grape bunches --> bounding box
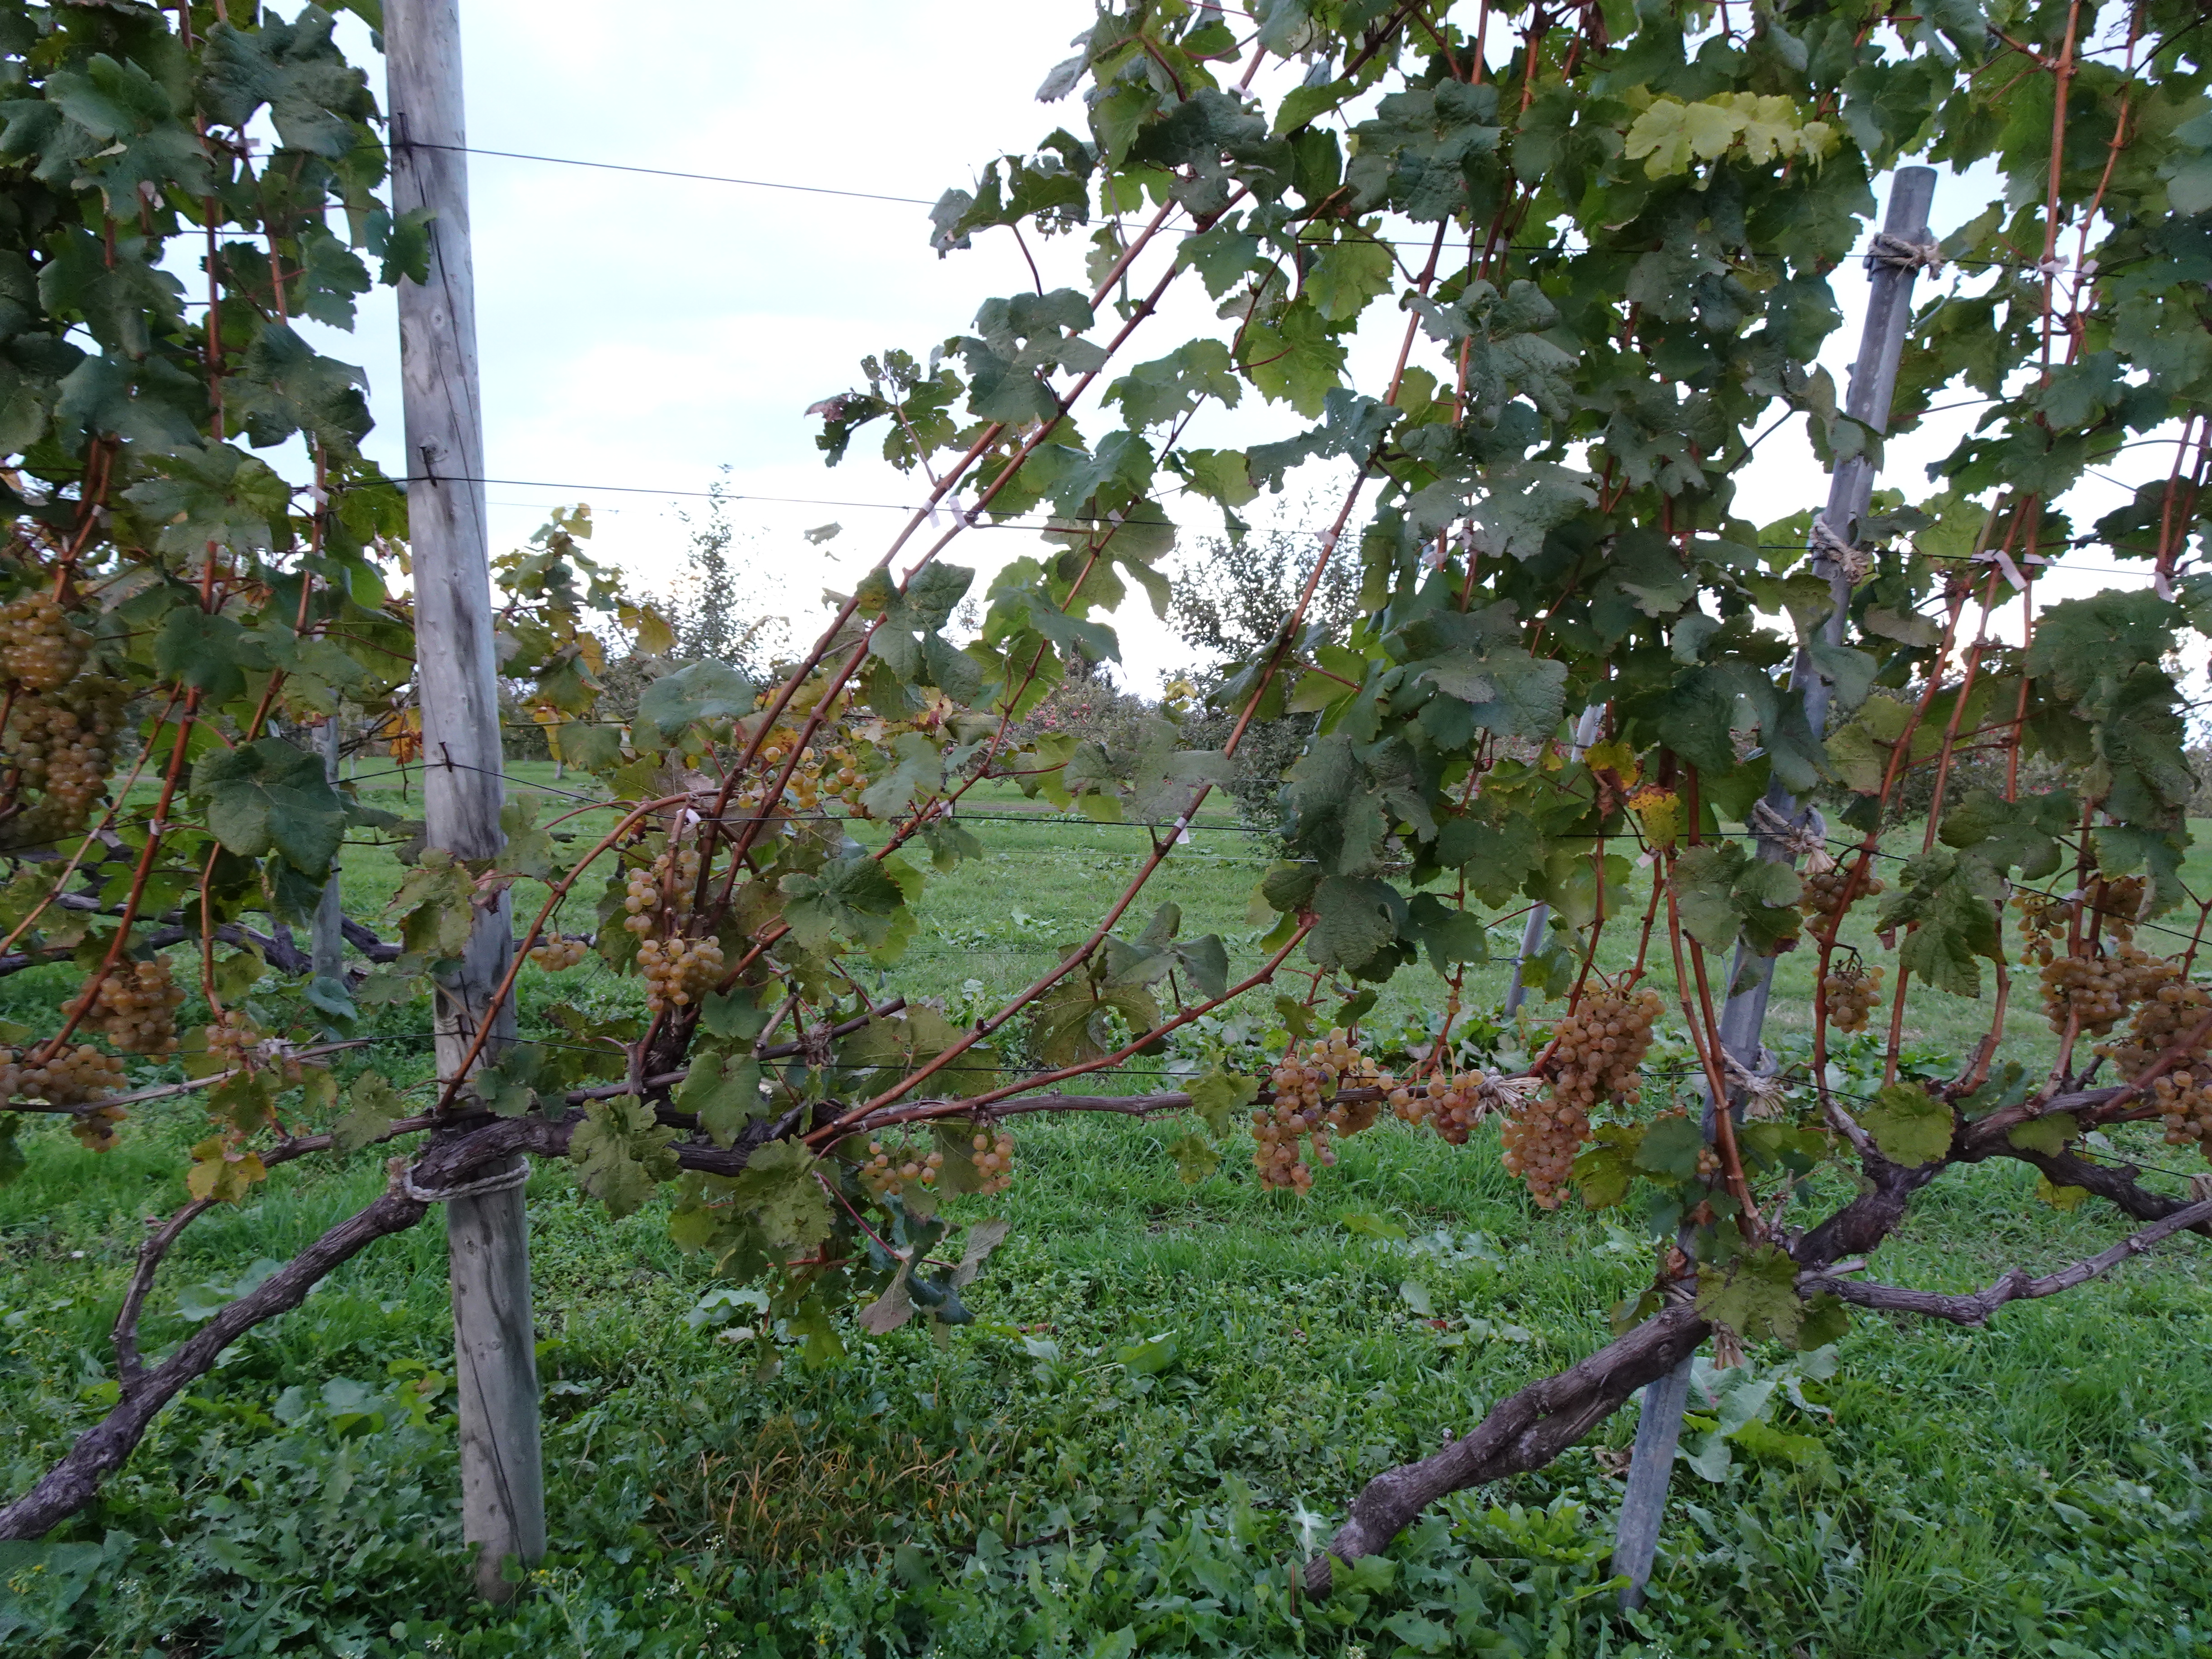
[41,1044,137,1158]
[1386,1082,1432,1132]
[1608,989,1668,1095]
[1810,962,1888,1035]
[1270,1059,1337,1165]
[1310,1027,1360,1078]
[824,723,872,819]
[734,770,767,808]
[10,695,55,792]
[636,937,695,1012]
[527,931,590,973]
[2091,1035,2160,1085]
[1651,1100,1700,1123]
[0,593,94,692]
[1247,1109,1314,1198]
[1428,1065,1486,1146]
[696,926,729,990]
[0,1039,55,1103]
[2040,957,2125,1039]
[1549,977,1619,1107]
[44,711,124,833]
[2014,893,2070,970]
[75,954,187,1072]
[1325,1054,1397,1141]
[765,743,819,809]
[2130,979,2211,1048]
[863,1139,902,1198]
[1687,1146,1722,1178]
[1811,867,1888,921]
[899,1151,946,1183]
[2109,942,2183,1004]
[196,1011,260,1065]
[1499,1102,1596,1212]
[971,1131,1017,1198]
[2152,1069,2212,1147]
[622,864,659,934]
[2083,875,2146,946]
[657,846,709,926]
